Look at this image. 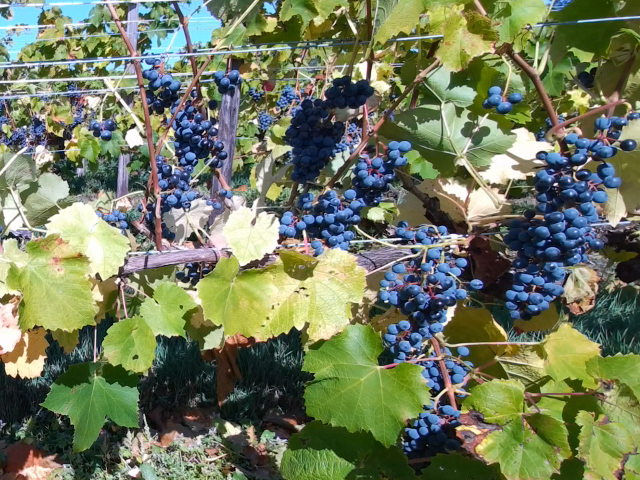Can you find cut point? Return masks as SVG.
<instances>
[{"mask_svg":"<svg viewBox=\"0 0 640 480\" xmlns=\"http://www.w3.org/2000/svg\"><path fill=\"white\" fill-rule=\"evenodd\" d=\"M501 59L505 63L507 68L509 69V72H508V75H507V81H506V84H505V88H508L509 87V83H510V78H511V75H512V67H511L510 63L508 62V60L505 58V54H501Z\"/></svg>","mask_w":640,"mask_h":480,"instance_id":"cut-point-1","label":"cut point"},{"mask_svg":"<svg viewBox=\"0 0 640 480\" xmlns=\"http://www.w3.org/2000/svg\"><path fill=\"white\" fill-rule=\"evenodd\" d=\"M182 29H183V26H182V25H180V26L177 28V30H176V32H175V34H174V36H173L172 40H171V41H170V43H169V48H172L173 43L176 41L177 36H178V34L180 33V31H181Z\"/></svg>","mask_w":640,"mask_h":480,"instance_id":"cut-point-2","label":"cut point"},{"mask_svg":"<svg viewBox=\"0 0 640 480\" xmlns=\"http://www.w3.org/2000/svg\"><path fill=\"white\" fill-rule=\"evenodd\" d=\"M146 191H138V192H132V193H127L124 195L119 196V199H124L130 196H134V195H141V194H145Z\"/></svg>","mask_w":640,"mask_h":480,"instance_id":"cut-point-3","label":"cut point"},{"mask_svg":"<svg viewBox=\"0 0 640 480\" xmlns=\"http://www.w3.org/2000/svg\"><path fill=\"white\" fill-rule=\"evenodd\" d=\"M572 131H575L576 135H583V131L579 127H571L569 129H566V133H569Z\"/></svg>","mask_w":640,"mask_h":480,"instance_id":"cut-point-4","label":"cut point"}]
</instances>
